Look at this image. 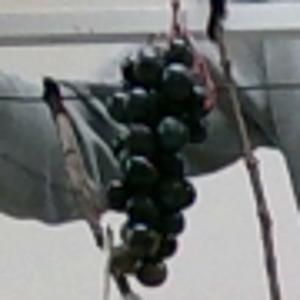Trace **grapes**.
I'll use <instances>...</instances> for the list:
<instances>
[{
	"label": "grapes",
	"mask_w": 300,
	"mask_h": 300,
	"mask_svg": "<svg viewBox=\"0 0 300 300\" xmlns=\"http://www.w3.org/2000/svg\"><path fill=\"white\" fill-rule=\"evenodd\" d=\"M191 38L178 35L168 49L147 44L122 57L119 70L124 90L108 97L105 111L119 126L110 154L122 175L104 184L101 197L108 210L127 215L120 228L122 244L109 251L108 261L120 276L136 275L143 286L164 284V259L178 249L176 237L186 221L182 211L197 201V189L185 179L191 170L180 152L187 142L206 141L216 105L196 65Z\"/></svg>",
	"instance_id": "01657485"
}]
</instances>
